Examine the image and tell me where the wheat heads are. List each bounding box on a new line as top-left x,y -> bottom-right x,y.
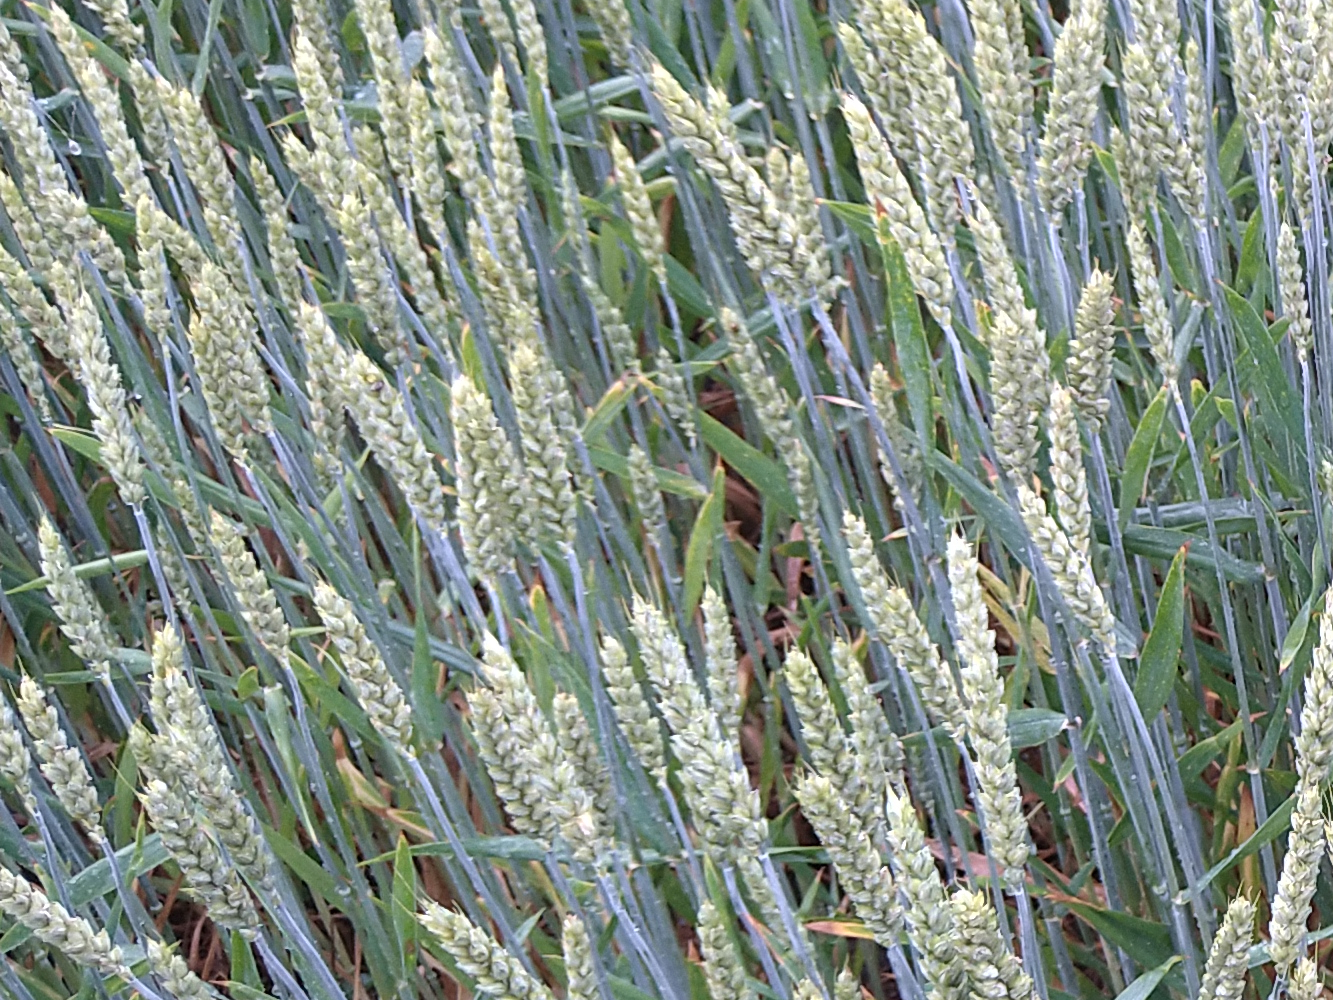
489,67 -> 528,205
887,790 -> 955,1000
208,513 -> 289,664
129,64 -> 170,166
876,0 -> 977,171
1270,787 -> 1327,969
292,32 -> 350,183
157,523 -> 194,613
1276,224 -> 1312,348
50,264 -> 82,321
1294,558 -> 1333,787
1184,41 -> 1208,163
148,627 -> 187,733
497,0 -> 549,85
281,137 -> 342,226
0,682 -> 34,798
1213,922 -> 1260,1000
968,203 -> 1044,353
869,367 -> 924,493
793,781 -> 910,945
416,907 -> 617,1000
968,705 -> 1030,884
721,311 -> 796,451
249,157 -> 287,222
155,85 -> 216,204
660,700 -> 728,842
7,138 -> 73,257
0,107 -> 40,185
1066,274 -> 1117,426
50,194 -> 132,293
1035,16 -> 1077,203
628,447 -> 666,540
1068,0 -> 1111,213
45,12 -> 153,206
165,671 -> 226,778
737,857 -> 795,954
766,146 -> 789,219
702,591 -> 743,725
1109,131 -> 1137,220
141,784 -> 260,934
25,172 -> 73,260
1198,899 -> 1240,1000
563,0 -> 634,65
657,349 -> 698,441
468,226 -> 525,347
1049,387 -> 1092,559
1,306 -> 53,421
303,304 -> 390,465
842,104 -> 955,314
837,27 -> 916,167
841,517 -> 897,651
947,534 -> 999,699
1,176 -> 56,281
1017,491 -> 1115,644
649,75 -> 837,300
789,444 -> 822,551
374,86 -> 413,178
0,18 -> 33,91
1126,224 -> 1177,375
629,600 -> 703,727
480,253 -> 527,333
598,637 -> 666,781
954,894 -> 1060,1000
552,694 -> 619,835
425,33 -> 479,187
339,200 -> 408,364
790,155 -> 835,292
17,678 -> 102,838
77,0 -> 141,48
697,902 -> 763,1000
175,483 -> 220,569
989,319 -> 1037,485
138,411 -> 180,480
409,84 -> 446,227
179,91 -> 239,219
548,372 -> 596,497
832,643 -> 906,789
1111,0 -> 1176,78
887,590 -> 967,734
1131,0 -> 1181,47
191,284 -> 271,430
612,138 -> 666,274
82,63 -> 151,207
146,942 -> 233,1000
312,588 -> 415,755
58,293 -> 149,502
356,352 -> 450,529
451,374 -> 506,578
1292,145 -> 1313,221
907,72 -> 961,239
137,204 -> 171,331
966,0 -> 1024,195
490,185 -> 541,310
396,225 -> 452,352
1276,51 -> 1288,129
188,769 -> 283,928
0,247 -> 75,358
187,318 -> 248,458
871,27 -> 913,136
781,654 -> 884,839
581,276 -> 640,374
37,521 -> 117,670
560,917 -> 611,1000
1,869 -> 133,975
1226,0 -> 1270,138
461,0 -> 519,69
0,67 -> 71,197
705,714 -> 769,842
875,749 -> 924,816
705,88 -> 763,277
282,0 -> 345,98
999,0 -> 1033,112
510,351 -> 576,551
834,970 -> 873,1000
1294,51 -> 1333,186
204,211 -> 256,301
440,252 -> 460,318
156,213 -> 207,283
354,166 -> 400,262
131,729 -> 179,795
480,634 -> 588,845
267,219 -> 303,316
347,0 -> 413,176
300,319 -> 346,451
1121,52 -> 1203,214
1271,0 -> 1312,81
206,267 -> 256,340
470,387 -> 536,539
463,688 -> 538,831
